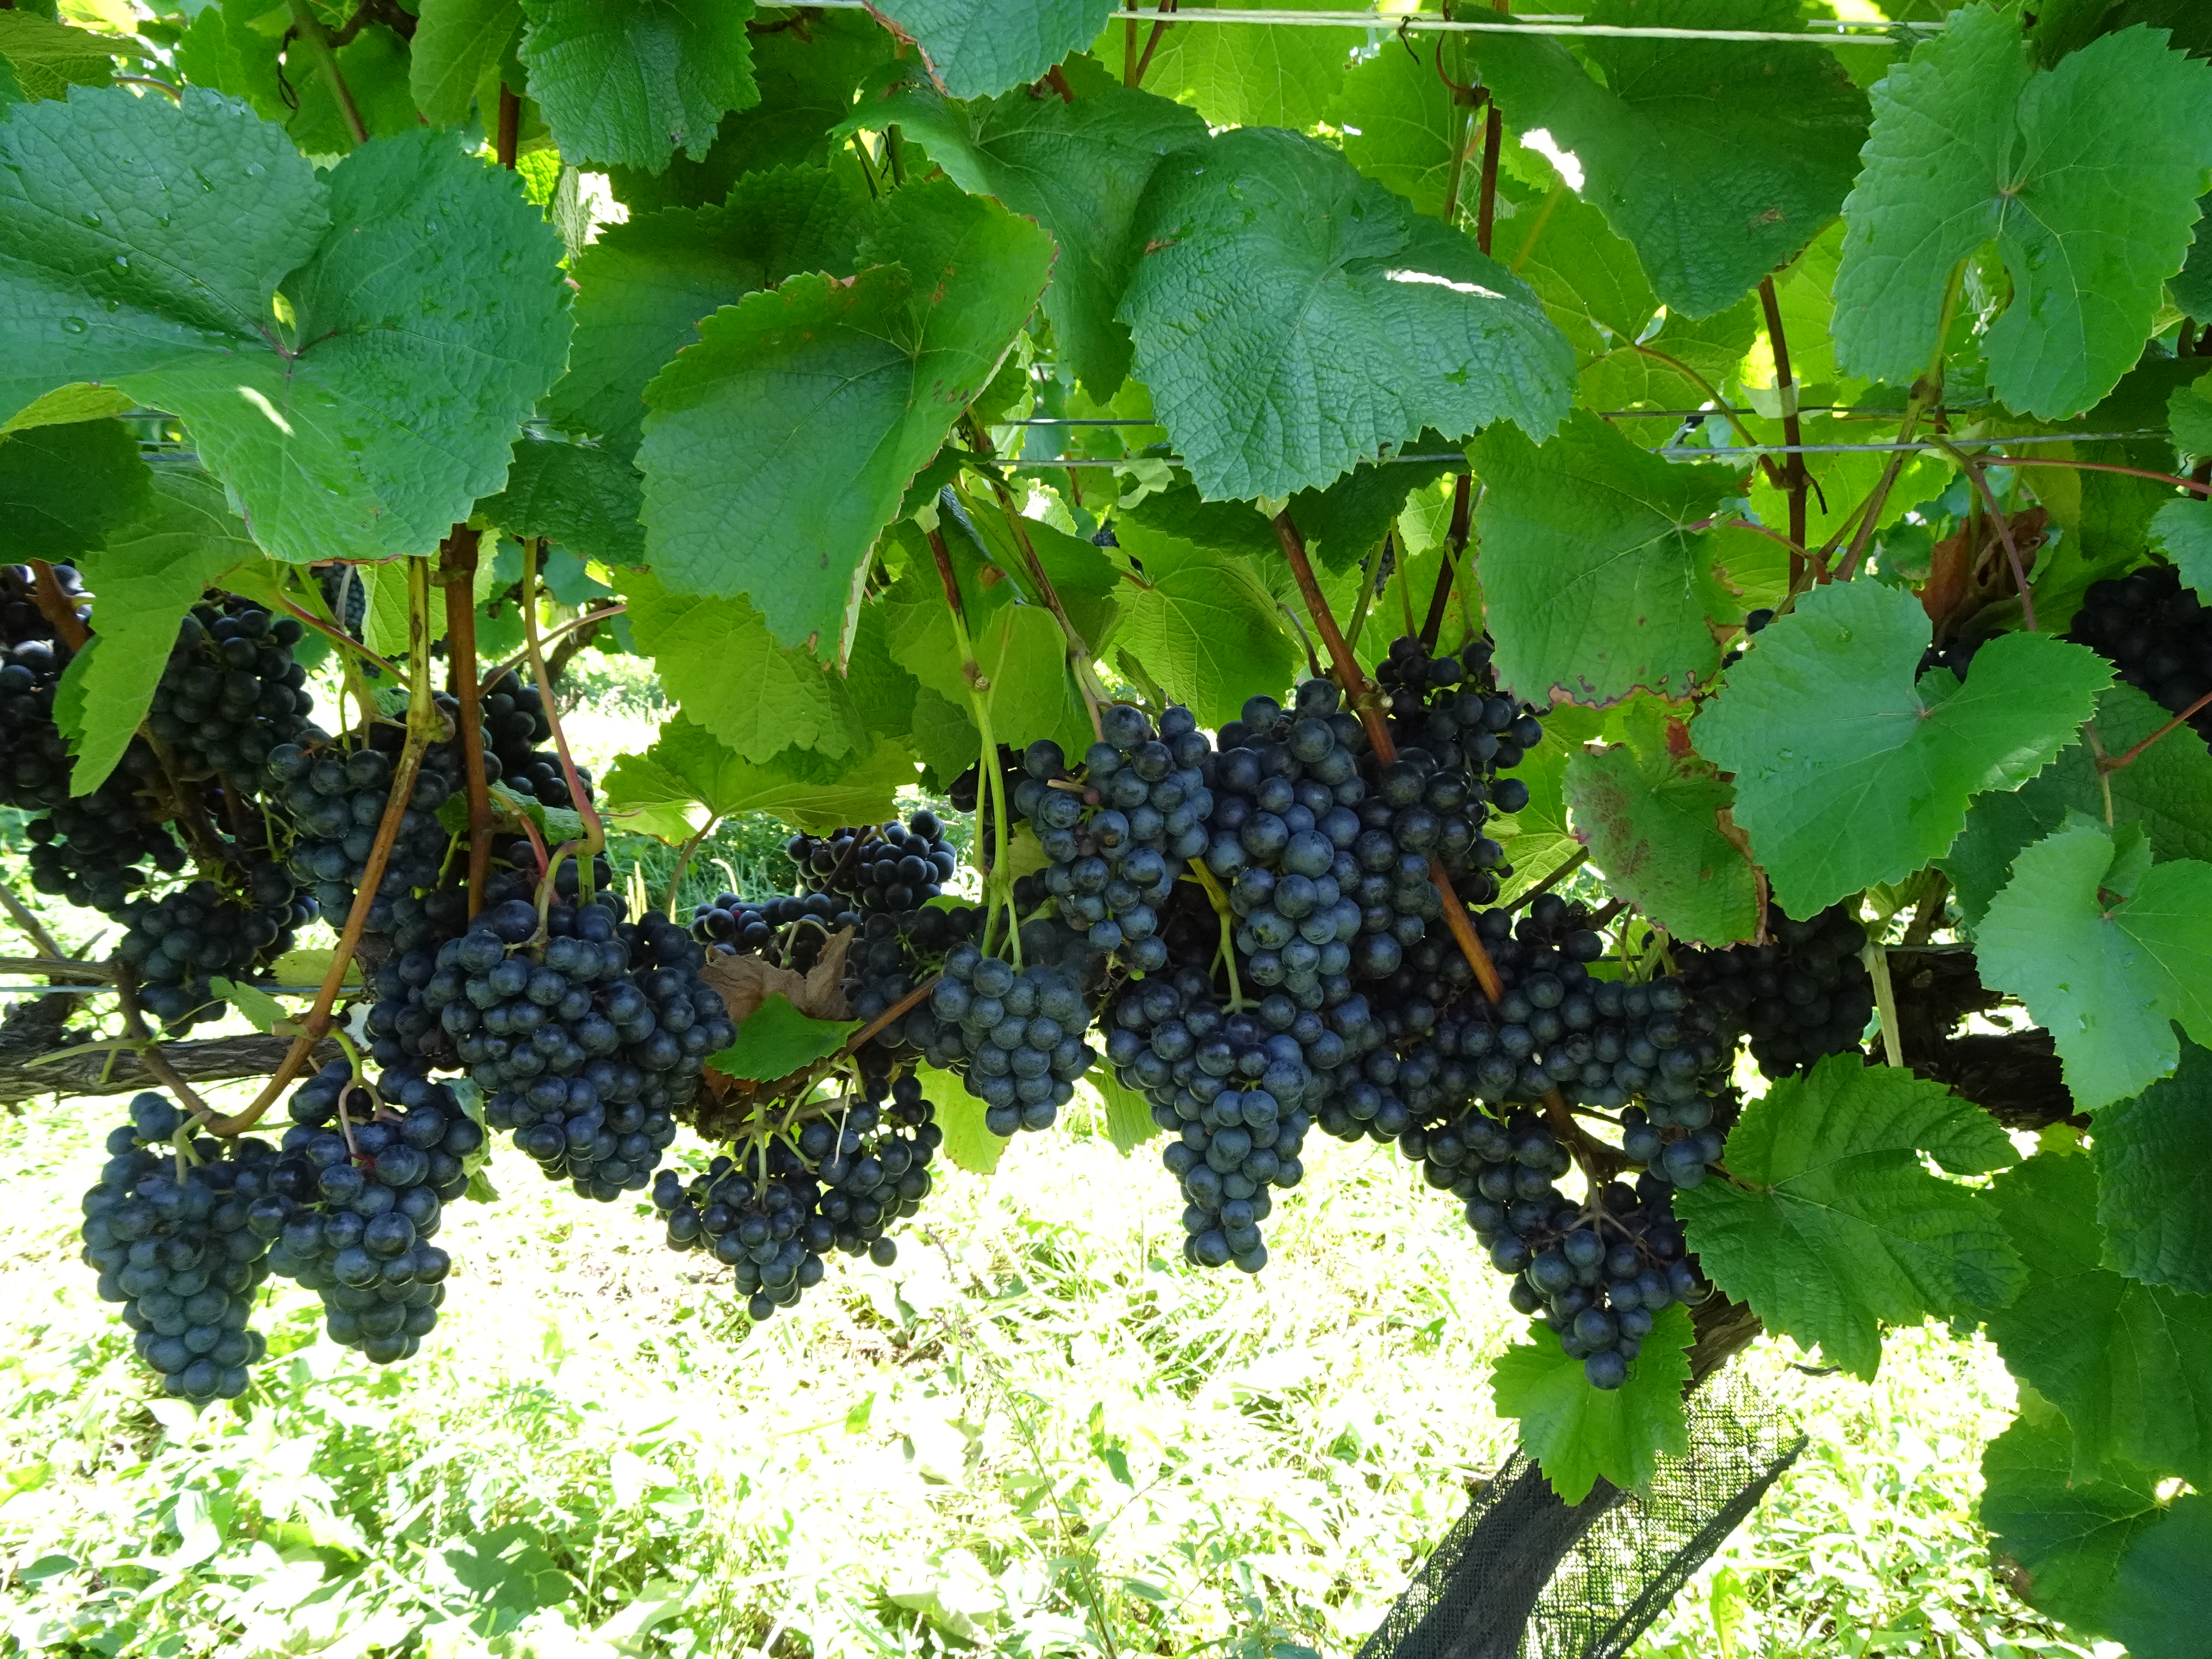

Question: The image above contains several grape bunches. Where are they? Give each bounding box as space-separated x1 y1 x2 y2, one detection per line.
1512 1173 1715 1390
0 564 96 810
480 836 614 912
80 1093 282 1402
198 788 306 865
148 587 324 792
26 816 146 923
906 918 1106 1136
396 671 594 806
546 914 735 1200
1500 963 1658 1113
248 1055 483 1365
118 860 319 1036
2068 563 2212 744
1625 975 1738 1191
973 869 1053 945
691 892 862 955
266 729 450 1075
845 905 972 1049
1157 866 1277 998
1376 636 1543 907
1721 608 1777 670
1479 892 1602 992
1398 1099 1570 1269
653 1133 835 1319
1354 747 1476 981
424 899 656 1169
949 747 1035 873
1099 965 1369 1273
799 1099 942 1266
1643 864 1877 1081
48 760 187 873
856 1052 928 1108
1015 703 1214 971
1200 680 1368 993
786 809 957 921
1317 918 1518 1142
